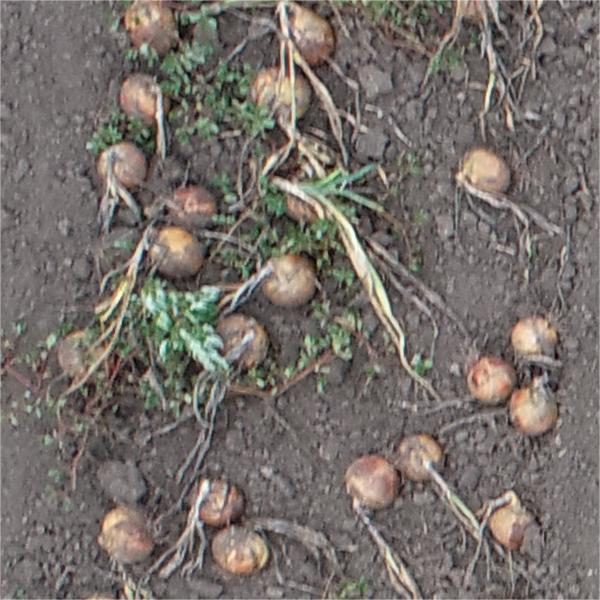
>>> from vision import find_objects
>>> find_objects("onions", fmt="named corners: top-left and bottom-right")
top-left (344, 456), bottom-right (398, 507)
top-left (258, 72), bottom-right (312, 118)
top-left (264, 252), bottom-right (315, 305)
top-left (51, 334), bottom-right (87, 380)
top-left (458, 147), bottom-right (508, 195)
top-left (273, 186), bottom-right (323, 224)
top-left (151, 225), bottom-right (203, 275)
top-left (117, 76), bottom-right (161, 122)
top-left (102, 143), bottom-right (149, 187)
top-left (196, 481), bottom-right (244, 525)
top-left (391, 432), bottom-right (440, 481)
top-left (212, 526), bottom-right (266, 573)
top-left (469, 357), bottom-right (514, 403)
top-left (483, 494), bottom-right (533, 548)
top-left (512, 316), bottom-right (556, 357)
top-left (507, 384), bottom-right (555, 433)
top-left (217, 315), bottom-right (267, 369)
top-left (124, 2), bottom-right (178, 54)
top-left (98, 506), bottom-right (152, 564)
top-left (171, 181), bottom-right (214, 224)
top-left (275, 7), bottom-right (333, 67)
